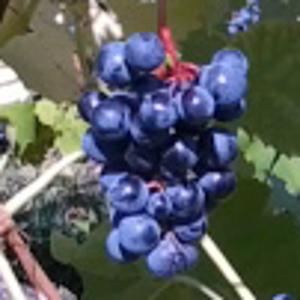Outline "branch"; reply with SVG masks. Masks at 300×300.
<instances>
[{
	"mask_svg": "<svg viewBox=\"0 0 300 300\" xmlns=\"http://www.w3.org/2000/svg\"><path fill=\"white\" fill-rule=\"evenodd\" d=\"M0 233L9 247L13 259L34 285L40 298L42 300H62L61 295L32 257L30 250L25 247L8 211L4 208H0Z\"/></svg>",
	"mask_w": 300,
	"mask_h": 300,
	"instance_id": "1",
	"label": "branch"
}]
</instances>
